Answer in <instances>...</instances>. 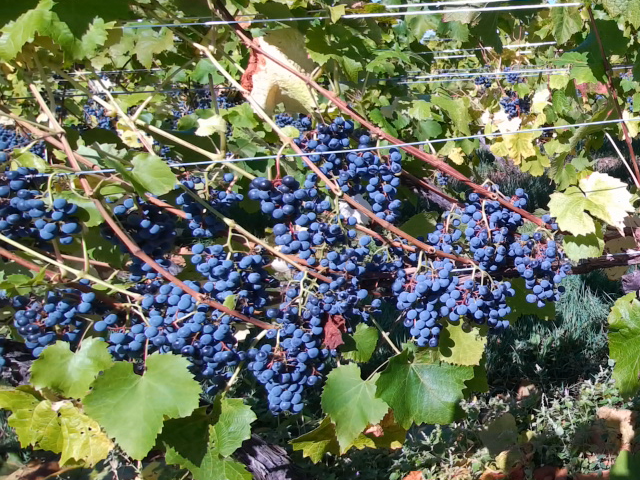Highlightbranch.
<instances>
[{
	"instance_id": "1",
	"label": "branch",
	"mask_w": 640,
	"mask_h": 480,
	"mask_svg": "<svg viewBox=\"0 0 640 480\" xmlns=\"http://www.w3.org/2000/svg\"><path fill=\"white\" fill-rule=\"evenodd\" d=\"M79 181L85 193L93 199V206L100 214H102L103 220L107 224H109V226L119 235V237L123 241L126 242L125 243L126 248L130 250L133 254H135L137 257L142 259L146 264L150 265L157 272L164 275L168 280L176 284L181 290L203 301L204 303H207L215 308H218L219 310L225 311L228 314L235 315L249 322L250 324H254L258 326L261 329L269 330L271 328V325L267 322H263L260 319L256 317H252L250 314L243 312L242 310L231 307L209 296H206L202 292L196 293L191 288L187 287L180 278H178L177 276L169 272L166 268H164L162 265H160L155 260L150 258L146 253L141 251L137 243L118 226V224L109 216V211L103 207V202L101 198L95 193L93 189L90 188L87 182V178L85 176H81L79 178Z\"/></svg>"
},
{
	"instance_id": "2",
	"label": "branch",
	"mask_w": 640,
	"mask_h": 480,
	"mask_svg": "<svg viewBox=\"0 0 640 480\" xmlns=\"http://www.w3.org/2000/svg\"><path fill=\"white\" fill-rule=\"evenodd\" d=\"M51 67L57 74H59L64 79H66L68 82L72 83L74 86L78 87L83 92H85L94 102L98 103L102 107H105L109 111L115 112L116 114H118L119 116L124 118L127 121L128 126L134 132V134L137 137V139L143 145L144 149L149 151L151 154H155L156 150L153 149L146 142V140L143 138V136L141 135V133L139 132L138 128L135 126L134 123L138 124L139 126H142V127L146 128V129H149V130L153 131L154 133H156L158 135L167 137V138L179 143L180 145H184L185 147H188L189 149H192L195 152L201 153L204 156H207V157H209V158H211L213 160L222 159V156L220 154L215 155L214 153H211L210 151H207V150H205L203 148L197 147L194 144H192V143H190V142H188L186 140H182L181 138L177 137L176 135H173L172 133H169V132H166L164 130L158 129L156 126H154L152 124H148L145 121H142L141 119L133 117L132 115H129L126 112H124L121 109V107L117 104L115 98L112 96L110 90L108 89V87L106 86L105 82L103 81L102 77L100 76L99 72L96 69H93L92 73H93L95 79L98 81L100 87L102 88V90L106 94L108 100L111 102V104L101 100L99 97L94 95V93L88 87H86L85 85L81 84L79 81L75 80L70 75H68L66 72L61 70L56 65L55 62L51 63Z\"/></svg>"
},
{
	"instance_id": "3",
	"label": "branch",
	"mask_w": 640,
	"mask_h": 480,
	"mask_svg": "<svg viewBox=\"0 0 640 480\" xmlns=\"http://www.w3.org/2000/svg\"><path fill=\"white\" fill-rule=\"evenodd\" d=\"M179 187L188 194L195 201L203 204L209 211H211L214 215H216L220 220H222L226 225L232 228L231 230V238L237 242L242 243L243 246L254 247L256 242L258 245L263 247L262 254L266 256H277L283 261L291 264L292 266L302 270L304 273L315 277L325 283L332 284L333 280L331 278H327L322 274L314 272L315 270H319L322 273H331L330 268H325L322 265H312L307 262L306 259H300L295 255L291 254H283L282 252L270 247L266 242L262 241L258 237L249 233L246 229L241 228L234 220H229L226 216H224L220 211L215 209L206 199L199 197L196 193L190 190L183 182L179 183Z\"/></svg>"
},
{
	"instance_id": "4",
	"label": "branch",
	"mask_w": 640,
	"mask_h": 480,
	"mask_svg": "<svg viewBox=\"0 0 640 480\" xmlns=\"http://www.w3.org/2000/svg\"><path fill=\"white\" fill-rule=\"evenodd\" d=\"M24 81H25L27 87L32 92V94L34 95V97L37 99V101L41 105V107H42L43 111L45 112L46 116L48 117L49 121L54 126V128L56 130V133H57V139L49 137L47 134L41 132L32 123H30L29 121L18 117L17 115L12 113L9 109H7L4 105H0V112L2 114H4L5 116H7L10 120L15 122L16 124H18V125H20L22 127H25L26 129L31 131L36 137H38L39 139L43 140L47 144H50V145H52L54 147H57V148L61 149L63 152H66V154L68 155V158H69V160L71 162L72 168H73V170L75 172H78L80 170V166H79L78 160L81 163H83L86 166H88L90 169H100V166L98 164L94 163L93 161H91L90 159H88L87 157H85L84 155H82L81 153L76 151L75 149H73L69 145V143L66 141V139L64 138V130H63L60 122L57 120L55 114L52 112L50 106L46 102V99L41 95V92L35 86L34 82L32 81V78L30 76H26L24 78Z\"/></svg>"
},
{
	"instance_id": "5",
	"label": "branch",
	"mask_w": 640,
	"mask_h": 480,
	"mask_svg": "<svg viewBox=\"0 0 640 480\" xmlns=\"http://www.w3.org/2000/svg\"><path fill=\"white\" fill-rule=\"evenodd\" d=\"M231 30L233 32H235L238 36H240L243 40H245V42L249 46H252L253 49L256 52H258L259 54L263 55L264 57L268 58L269 60H271L272 62H274L278 66H280L283 70H285L286 72L290 73L296 79L304 81L310 87H312L315 90H317L319 93H322L324 96L329 97L331 100H333L337 104V106L339 108H341L344 112H346L348 115H350L353 119H355L360 125H362L369 132L376 133L382 139L388 140L389 142L394 143V144L403 142L402 140L393 138L392 136L385 134L383 131H381L378 128L372 127L370 124H368L364 120H362L359 115H357L351 109H349L347 106H345L343 103H341V100L336 95H334L331 92L326 91L324 88L320 87L319 85H317L316 83L311 81V79L308 78L307 76L301 75L298 72L294 71L292 68L288 67L281 60L277 59L275 56L271 55L268 52H265L262 48H260L257 45V43L254 41V39L249 34V32L247 30H245L243 27H241L240 25H232L231 26Z\"/></svg>"
},
{
	"instance_id": "6",
	"label": "branch",
	"mask_w": 640,
	"mask_h": 480,
	"mask_svg": "<svg viewBox=\"0 0 640 480\" xmlns=\"http://www.w3.org/2000/svg\"><path fill=\"white\" fill-rule=\"evenodd\" d=\"M302 160L305 162V164L311 168L313 171L316 172V174L318 175V177L324 182L326 183L330 189L335 192L337 195H339L344 201L348 202L349 204H351L352 206H354L355 208H357L358 210L364 212L366 215L370 216V218L377 224L379 225H383L386 229L393 231L395 233H398L400 236H402L403 238L409 240L410 242H412L414 245L420 247L421 249H424L426 252H428L431 255H437L439 257H444V258H449V259H454L460 262H465V263H473L474 259L473 258H467V257H463L460 255H456V254H452V253H447V252H442L440 250L434 249L433 247H431L430 245H425L424 243L420 242L419 240H417L415 237L411 236L410 234L405 233L401 228L395 227L390 225L387 221L382 220L380 218H378L374 212L368 210L365 206H362L361 204H359L358 202H356L354 199L348 197L345 193H343L339 188H337L335 186L334 183H332L323 173L322 171L315 165L313 164L308 158L307 156H303Z\"/></svg>"
},
{
	"instance_id": "7",
	"label": "branch",
	"mask_w": 640,
	"mask_h": 480,
	"mask_svg": "<svg viewBox=\"0 0 640 480\" xmlns=\"http://www.w3.org/2000/svg\"><path fill=\"white\" fill-rule=\"evenodd\" d=\"M403 150L409 154H412L420 159H423L427 162H431L433 164H435L438 168H442L444 170H446L448 173L452 174L455 178L463 181L464 183L468 184L469 186L472 187V190L475 192H479L484 196L487 197H491L492 200H498L500 204L504 205L507 208L512 209L513 211H515L516 213L521 214L524 218L535 222L536 224H538L540 227H544L545 223L539 219L536 215L531 214L530 212L517 207L516 205H514L513 203L507 202L506 200H504L502 197H499L497 194L488 191L487 189H485L484 187H482L481 185L477 184L476 182L472 181L470 178H468L465 174H463L460 171H457L456 169H452L450 166L444 164L440 159H437L436 157H433L432 155L428 154L427 152H424L420 149H417L415 147H403Z\"/></svg>"
},
{
	"instance_id": "8",
	"label": "branch",
	"mask_w": 640,
	"mask_h": 480,
	"mask_svg": "<svg viewBox=\"0 0 640 480\" xmlns=\"http://www.w3.org/2000/svg\"><path fill=\"white\" fill-rule=\"evenodd\" d=\"M0 239L7 240L11 244H13L16 248L20 249L21 251L27 252V253L31 254L32 256H34L35 258H37L39 260H42L44 262H47V263L51 264L52 266L58 267V268L63 269V270H67L68 272H70L71 274L76 275L77 277L81 278L82 280H86V281H90V282H93V283L100 284V285H102L104 287H107L109 289L118 291V292H120V293H122L124 295H127V296H131V297H134V298H137V299H141L142 298V295L140 293L129 291V290L124 289V288H122L120 286H117V285L111 284L109 282H106V281H104V280H102L100 278H95V277H92V276L85 275L84 273H81L80 271L74 269L73 267H70L69 265L62 264L60 262L54 261L53 259L49 258V257L56 258L57 254L55 252L47 251V250L42 249L40 247H36L35 250H33L30 247H26V246L20 244L12 236L5 235V234H2V233H0Z\"/></svg>"
},
{
	"instance_id": "9",
	"label": "branch",
	"mask_w": 640,
	"mask_h": 480,
	"mask_svg": "<svg viewBox=\"0 0 640 480\" xmlns=\"http://www.w3.org/2000/svg\"><path fill=\"white\" fill-rule=\"evenodd\" d=\"M174 34L176 35L177 38L181 39L187 44L194 46L203 54H205L212 61L215 67L218 70H220V72L248 99V101L260 113V115L263 116V118L275 129V131L280 135V137L283 139V141L287 144L289 148L293 149L295 152L302 151L301 148H299L297 145L293 144L290 141L288 136L281 130L279 125L260 107V105L252 97V95L240 83H238V81L235 80L233 76L218 62L216 57L210 51H208L205 47H203L201 44L197 43L196 41L184 36L178 30H175Z\"/></svg>"
},
{
	"instance_id": "10",
	"label": "branch",
	"mask_w": 640,
	"mask_h": 480,
	"mask_svg": "<svg viewBox=\"0 0 640 480\" xmlns=\"http://www.w3.org/2000/svg\"><path fill=\"white\" fill-rule=\"evenodd\" d=\"M587 14H588V17H589V19L591 21L593 33H594V36H595V39H596V44H597L598 50L600 52L603 64L605 66L606 75L608 77V82H609V88H610V91H611V94H612V98H613V100H614V102L616 104V108H617V111H618V114H619V118H624V111H623V108L621 106V102H620V100H619V98L617 96L616 88L614 87V80H613V75H612V72H611L610 64L608 62V58H607L605 50L603 48V44L601 42L600 33H599V30H598V27H597V22H596V19H595L594 15H593L591 7L587 8Z\"/></svg>"
},
{
	"instance_id": "11",
	"label": "branch",
	"mask_w": 640,
	"mask_h": 480,
	"mask_svg": "<svg viewBox=\"0 0 640 480\" xmlns=\"http://www.w3.org/2000/svg\"><path fill=\"white\" fill-rule=\"evenodd\" d=\"M44 274L47 277H49L51 280L59 281L60 283L65 284V285H67V286H69L71 288H74L76 290L83 291L85 293L94 292L96 294L97 298H99L102 301L111 303V306L114 309L121 310V311H126L127 310V307H126L125 304H123L120 301H116L113 298H110V297L102 295L101 291L97 287H89L88 285H81L79 282L73 281L70 278L65 277V276H63L61 274H57V273L53 272L50 269H46L44 271Z\"/></svg>"
},
{
	"instance_id": "12",
	"label": "branch",
	"mask_w": 640,
	"mask_h": 480,
	"mask_svg": "<svg viewBox=\"0 0 640 480\" xmlns=\"http://www.w3.org/2000/svg\"><path fill=\"white\" fill-rule=\"evenodd\" d=\"M402 175L406 176L409 179H411L413 182L425 187L426 189L432 191L433 193H436V194L440 195L441 197H443V198L447 199L448 201L452 202L453 204H455V205H457L459 207L463 206V203L460 200H458V199L452 197L451 195L447 194L446 192H444V191H442V190H440V189L428 184L427 182L415 177L413 174L409 173L408 171H403Z\"/></svg>"
},
{
	"instance_id": "13",
	"label": "branch",
	"mask_w": 640,
	"mask_h": 480,
	"mask_svg": "<svg viewBox=\"0 0 640 480\" xmlns=\"http://www.w3.org/2000/svg\"><path fill=\"white\" fill-rule=\"evenodd\" d=\"M357 230L362 232V233H366V234H369L371 236L376 237L382 243H385V244H388V245H392V246H399V247H401V248H403L405 250H408V251H410L412 253H416L417 252V249L415 247H412V246H410L408 244H405L402 241H394V240L387 239V238L383 237L377 231H374V230H371V229H368V228H364L361 225L357 226Z\"/></svg>"
},
{
	"instance_id": "14",
	"label": "branch",
	"mask_w": 640,
	"mask_h": 480,
	"mask_svg": "<svg viewBox=\"0 0 640 480\" xmlns=\"http://www.w3.org/2000/svg\"><path fill=\"white\" fill-rule=\"evenodd\" d=\"M0 254L4 255L8 260L12 261L13 263L23 266L29 270H32L36 273H39L41 271V267L37 264H34L32 262H29L23 258H20L14 254H12L10 251H8L5 247L0 246Z\"/></svg>"
},
{
	"instance_id": "15",
	"label": "branch",
	"mask_w": 640,
	"mask_h": 480,
	"mask_svg": "<svg viewBox=\"0 0 640 480\" xmlns=\"http://www.w3.org/2000/svg\"><path fill=\"white\" fill-rule=\"evenodd\" d=\"M621 130H622V133H623L626 145H627V149H628L629 155H630V157L632 159L633 166H634V168L636 170V181L640 182V165L638 163L637 156L634 153V150H633V147H632V143H631V140H630L627 128H626V123H621Z\"/></svg>"
},
{
	"instance_id": "16",
	"label": "branch",
	"mask_w": 640,
	"mask_h": 480,
	"mask_svg": "<svg viewBox=\"0 0 640 480\" xmlns=\"http://www.w3.org/2000/svg\"><path fill=\"white\" fill-rule=\"evenodd\" d=\"M147 201L149 203H153V204H156L158 206H161L165 210L169 211L170 213H172L174 215H177L181 219H185L187 217V214L183 210L172 206L171 204H169L168 202L164 201L163 199H160V198L155 197V196H149L147 198Z\"/></svg>"
},
{
	"instance_id": "17",
	"label": "branch",
	"mask_w": 640,
	"mask_h": 480,
	"mask_svg": "<svg viewBox=\"0 0 640 480\" xmlns=\"http://www.w3.org/2000/svg\"><path fill=\"white\" fill-rule=\"evenodd\" d=\"M102 176L105 179L118 184L119 186L124 188L126 191L131 192L132 194H136L138 192V189L135 186L129 184L126 181H124L122 178L118 177L117 175L105 174V175H102Z\"/></svg>"
},
{
	"instance_id": "18",
	"label": "branch",
	"mask_w": 640,
	"mask_h": 480,
	"mask_svg": "<svg viewBox=\"0 0 640 480\" xmlns=\"http://www.w3.org/2000/svg\"><path fill=\"white\" fill-rule=\"evenodd\" d=\"M226 167L232 168L240 173H242L246 178H248L249 180H253L254 176L252 174H250L248 171H246L244 168L236 165L235 163H229V164H225Z\"/></svg>"
},
{
	"instance_id": "19",
	"label": "branch",
	"mask_w": 640,
	"mask_h": 480,
	"mask_svg": "<svg viewBox=\"0 0 640 480\" xmlns=\"http://www.w3.org/2000/svg\"><path fill=\"white\" fill-rule=\"evenodd\" d=\"M60 257L62 259H65V260H68V261H73V262H80V263H86L87 262L86 258L70 256V255H67V254H64V253H61Z\"/></svg>"
},
{
	"instance_id": "20",
	"label": "branch",
	"mask_w": 640,
	"mask_h": 480,
	"mask_svg": "<svg viewBox=\"0 0 640 480\" xmlns=\"http://www.w3.org/2000/svg\"><path fill=\"white\" fill-rule=\"evenodd\" d=\"M90 263L91 264H96V265H99V266H102V267H105V268H111L112 267L111 263H107V262H104V261H101V260H98V259H91Z\"/></svg>"
}]
</instances>
